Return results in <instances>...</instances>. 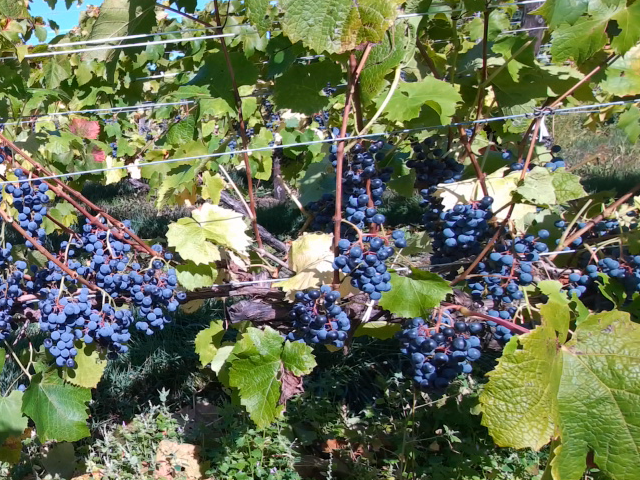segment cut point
<instances>
[{
	"label": "cut point",
	"mask_w": 640,
	"mask_h": 480,
	"mask_svg": "<svg viewBox=\"0 0 640 480\" xmlns=\"http://www.w3.org/2000/svg\"><path fill=\"white\" fill-rule=\"evenodd\" d=\"M72 239H73V236L70 234V236H69V238L67 240V245H66V249L64 251V255L68 254V251H69V248H70V243H71Z\"/></svg>",
	"instance_id": "4"
},
{
	"label": "cut point",
	"mask_w": 640,
	"mask_h": 480,
	"mask_svg": "<svg viewBox=\"0 0 640 480\" xmlns=\"http://www.w3.org/2000/svg\"><path fill=\"white\" fill-rule=\"evenodd\" d=\"M460 144H462V140L457 141L452 148L448 149L447 154H450L451 152L455 151Z\"/></svg>",
	"instance_id": "3"
},
{
	"label": "cut point",
	"mask_w": 640,
	"mask_h": 480,
	"mask_svg": "<svg viewBox=\"0 0 640 480\" xmlns=\"http://www.w3.org/2000/svg\"><path fill=\"white\" fill-rule=\"evenodd\" d=\"M342 224L348 226L350 229H352L357 235H361L362 231L356 226L354 225L351 221L346 220L344 217H342Z\"/></svg>",
	"instance_id": "1"
},
{
	"label": "cut point",
	"mask_w": 640,
	"mask_h": 480,
	"mask_svg": "<svg viewBox=\"0 0 640 480\" xmlns=\"http://www.w3.org/2000/svg\"><path fill=\"white\" fill-rule=\"evenodd\" d=\"M155 259L161 260V262H162V263H167V260H165V259H164L163 257H161V256H157L156 258L151 257V258H150V261H149V264H148V268H151L152 263H153V261H154Z\"/></svg>",
	"instance_id": "2"
}]
</instances>
